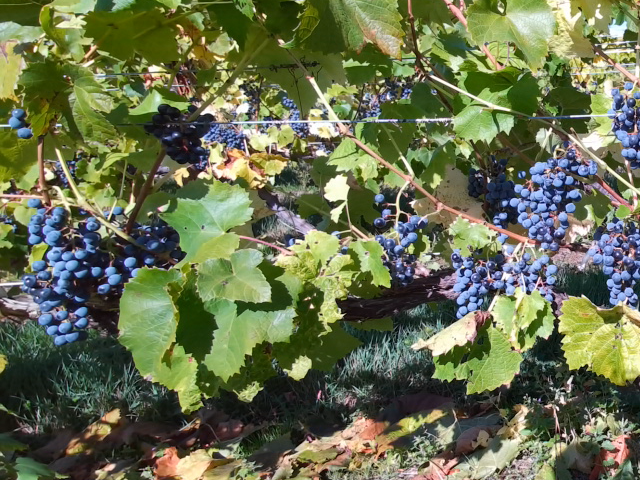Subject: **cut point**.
Instances as JSON below:
<instances>
[{"mask_svg": "<svg viewBox=\"0 0 640 480\" xmlns=\"http://www.w3.org/2000/svg\"><path fill=\"white\" fill-rule=\"evenodd\" d=\"M48 186H49V189H55L58 192L59 196L61 197L63 206L67 207L68 201H67L66 195L63 192V189L57 184H48Z\"/></svg>", "mask_w": 640, "mask_h": 480, "instance_id": "cut-point-1", "label": "cut point"}, {"mask_svg": "<svg viewBox=\"0 0 640 480\" xmlns=\"http://www.w3.org/2000/svg\"><path fill=\"white\" fill-rule=\"evenodd\" d=\"M408 185H409V183H407V182H403V183L401 184V186L399 187V189H398V191H397V194H396V196H395V204H396V205H399V204H400V199H401V196H402V194H403V191L405 190V188H406Z\"/></svg>", "mask_w": 640, "mask_h": 480, "instance_id": "cut-point-2", "label": "cut point"}, {"mask_svg": "<svg viewBox=\"0 0 640 480\" xmlns=\"http://www.w3.org/2000/svg\"><path fill=\"white\" fill-rule=\"evenodd\" d=\"M527 246L530 248V251L532 252V255L536 256V253H535V250H534L533 246L528 244L527 242L524 243L522 254L526 253Z\"/></svg>", "mask_w": 640, "mask_h": 480, "instance_id": "cut-point-3", "label": "cut point"}]
</instances>
